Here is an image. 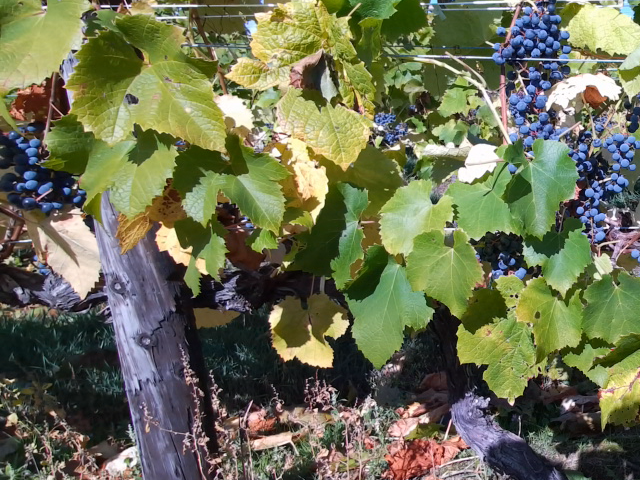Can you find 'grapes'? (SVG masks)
Instances as JSON below:
<instances>
[{
  "label": "grapes",
  "mask_w": 640,
  "mask_h": 480,
  "mask_svg": "<svg viewBox=\"0 0 640 480\" xmlns=\"http://www.w3.org/2000/svg\"><path fill=\"white\" fill-rule=\"evenodd\" d=\"M522 78V84L525 86L526 95L522 94H512V91L515 89V84L513 82H508L506 84L505 92L508 97L510 115L514 119V123L518 125V132L527 136L521 144V148L526 150L527 148H531L535 142V138L537 140H554L559 142L561 140V135L568 131L566 126H562L559 129L554 128V125L549 121L550 114L548 112H540L538 114L537 120L534 121L529 126L525 124L527 113L525 112L529 105L532 103L536 109L544 110L546 108V103L549 101V97L547 95H538L536 94V87L539 90L548 91L553 87V84L548 81V75L545 72H541L535 65H530L528 67V71H522L520 73Z\"/></svg>",
  "instance_id": "84f90ec7"
},
{
  "label": "grapes",
  "mask_w": 640,
  "mask_h": 480,
  "mask_svg": "<svg viewBox=\"0 0 640 480\" xmlns=\"http://www.w3.org/2000/svg\"><path fill=\"white\" fill-rule=\"evenodd\" d=\"M510 257L511 254L507 251H503L499 254V258L497 259V270L493 269L491 271V275L495 281H499L504 275V271L509 270L517 264V260Z\"/></svg>",
  "instance_id": "f8a65327"
},
{
  "label": "grapes",
  "mask_w": 640,
  "mask_h": 480,
  "mask_svg": "<svg viewBox=\"0 0 640 480\" xmlns=\"http://www.w3.org/2000/svg\"><path fill=\"white\" fill-rule=\"evenodd\" d=\"M535 11L531 6L522 10L523 16L514 20L511 27V40L509 45L500 47V42L492 45L494 53L491 60L496 65H504L508 57H524L530 53L535 57H552L558 50V58H569L572 51L570 45H562V40H568L570 33L561 29L558 24L563 22V17L557 13L555 0H548L547 6H543L541 0L535 2Z\"/></svg>",
  "instance_id": "0513c4c2"
},
{
  "label": "grapes",
  "mask_w": 640,
  "mask_h": 480,
  "mask_svg": "<svg viewBox=\"0 0 640 480\" xmlns=\"http://www.w3.org/2000/svg\"><path fill=\"white\" fill-rule=\"evenodd\" d=\"M542 67L545 70H551L549 72V77L551 79L563 80L566 75H569L571 73V66L569 65V63L543 62Z\"/></svg>",
  "instance_id": "5460f4e3"
},
{
  "label": "grapes",
  "mask_w": 640,
  "mask_h": 480,
  "mask_svg": "<svg viewBox=\"0 0 640 480\" xmlns=\"http://www.w3.org/2000/svg\"><path fill=\"white\" fill-rule=\"evenodd\" d=\"M591 137H593V131L583 132L582 136L577 139L579 152L577 153L576 150L569 149L567 156L572 157L576 162L577 180L579 182H582L586 178V173H588L590 188L584 190V195L588 199H592V202L587 201L584 206H578L575 212L578 215H582L579 216L581 223L587 224L589 218H592L594 222L592 227L595 231L593 238L592 235L587 232H581V235L586 236L589 243H592V241L598 243L607 237V234L602 229L603 225L599 224L607 219V215L597 208L600 205V199L610 192L620 194L624 190V187L630 185L629 180L625 176L616 172L622 168L628 169L630 172H634L637 169L635 164H630L634 159V153L630 150V146L633 149H640V141H637L635 136L612 133L603 143L600 138H595L591 142V145L595 148H601L603 146V148L611 154V159L616 162V164L611 166L613 173L609 176L610 181H606L604 188H602L598 181L603 180L606 177V173L601 168H597V161L594 158L587 160L589 145L584 141Z\"/></svg>",
  "instance_id": "b958b902"
},
{
  "label": "grapes",
  "mask_w": 640,
  "mask_h": 480,
  "mask_svg": "<svg viewBox=\"0 0 640 480\" xmlns=\"http://www.w3.org/2000/svg\"><path fill=\"white\" fill-rule=\"evenodd\" d=\"M0 169H10L14 166V173H5L0 178V189L12 192L7 195V202L24 211L40 210L50 213L61 210L63 202L81 207L87 201V192L77 190L72 194L75 179L64 170H57L51 177V171L44 166H37L40 158L42 141L39 138H23L17 131L5 134L0 129ZM41 202L33 196L19 195L24 191L33 192L35 196H42Z\"/></svg>",
  "instance_id": "01657485"
}]
</instances>
